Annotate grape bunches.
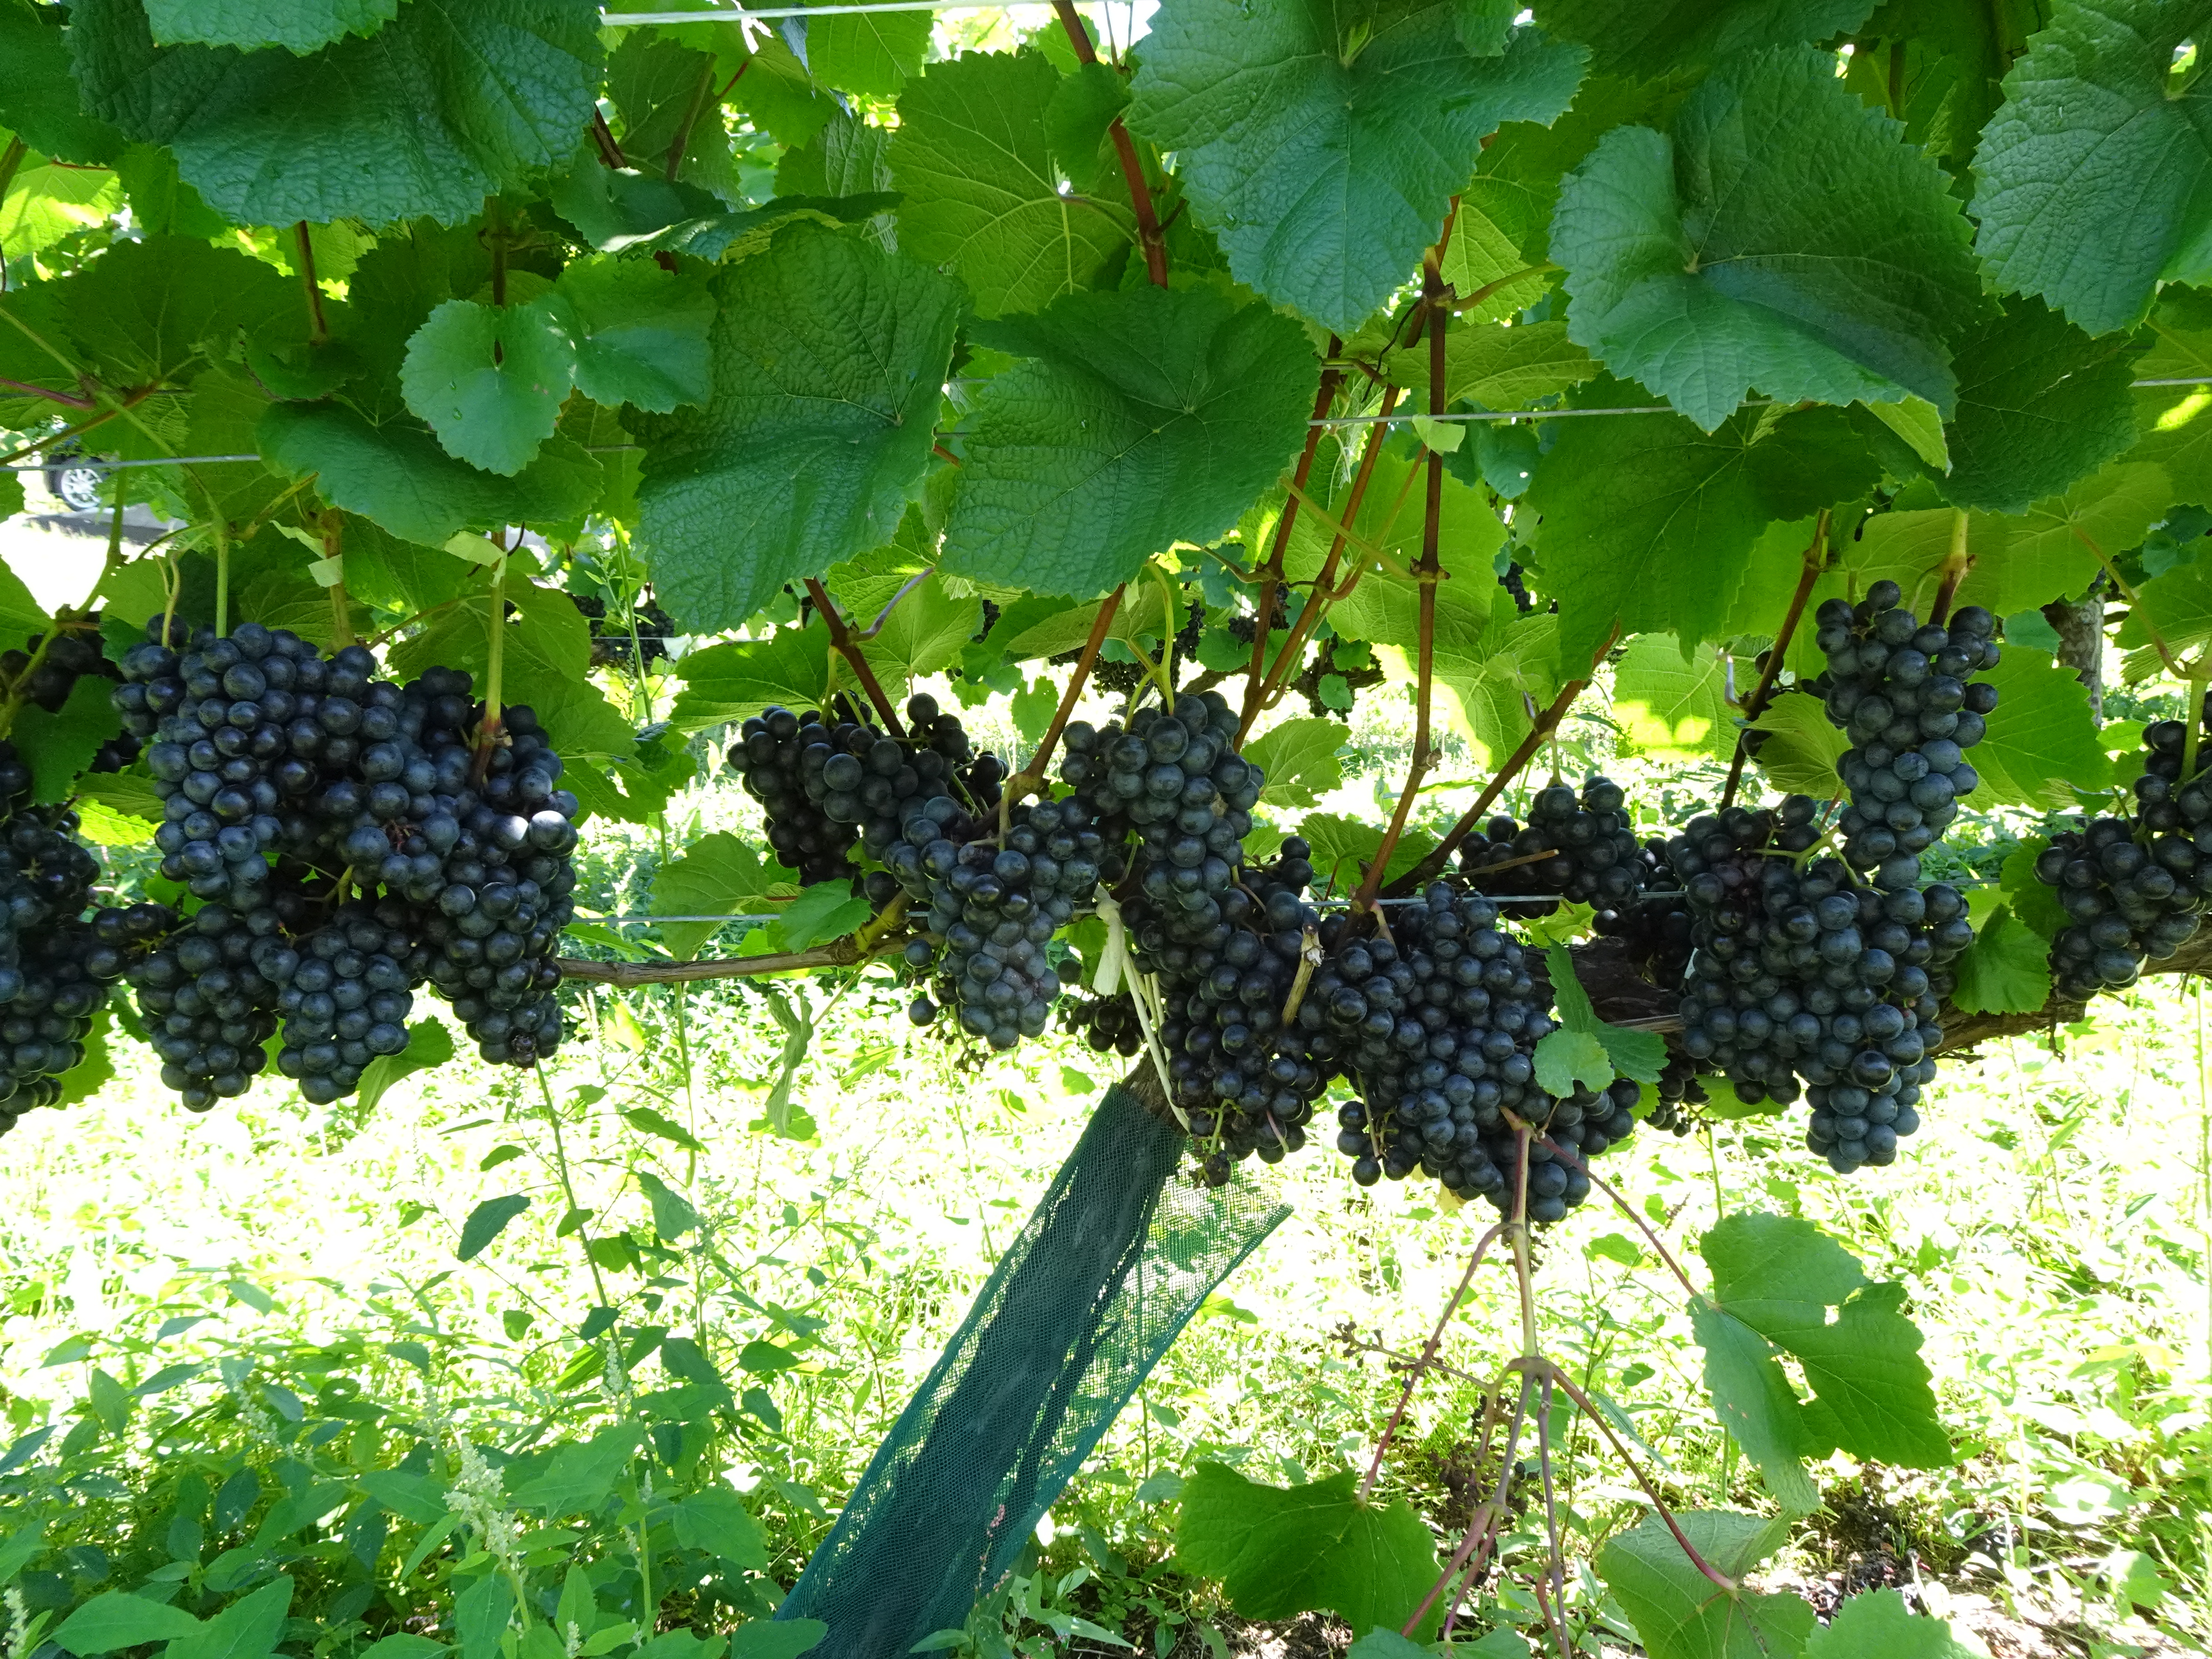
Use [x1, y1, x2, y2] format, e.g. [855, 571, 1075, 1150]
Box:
[1741, 650, 1836, 764]
[1643, 1051, 1720, 1137]
[112, 612, 375, 914]
[86, 902, 283, 1113]
[882, 796, 1111, 1050]
[1727, 1039, 1800, 1106]
[905, 692, 1011, 811]
[1, 806, 100, 1001]
[1816, 581, 2001, 888]
[727, 690, 872, 897]
[1120, 836, 1340, 1185]
[1326, 882, 1553, 1201]
[265, 849, 350, 943]
[251, 896, 434, 1105]
[1666, 795, 1823, 1067]
[375, 806, 574, 1068]
[2033, 818, 2212, 1002]
[403, 666, 578, 822]
[2134, 691, 2212, 892]
[1527, 776, 1647, 911]
[1060, 691, 1265, 934]
[1056, 959, 1143, 1056]
[0, 612, 143, 812]
[1459, 815, 1559, 921]
[1337, 1093, 1422, 1186]
[1788, 871, 1973, 1173]
[802, 724, 967, 861]
[322, 680, 478, 889]
[1, 915, 118, 1140]
[1486, 1072, 1640, 1232]
[1592, 837, 1694, 994]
